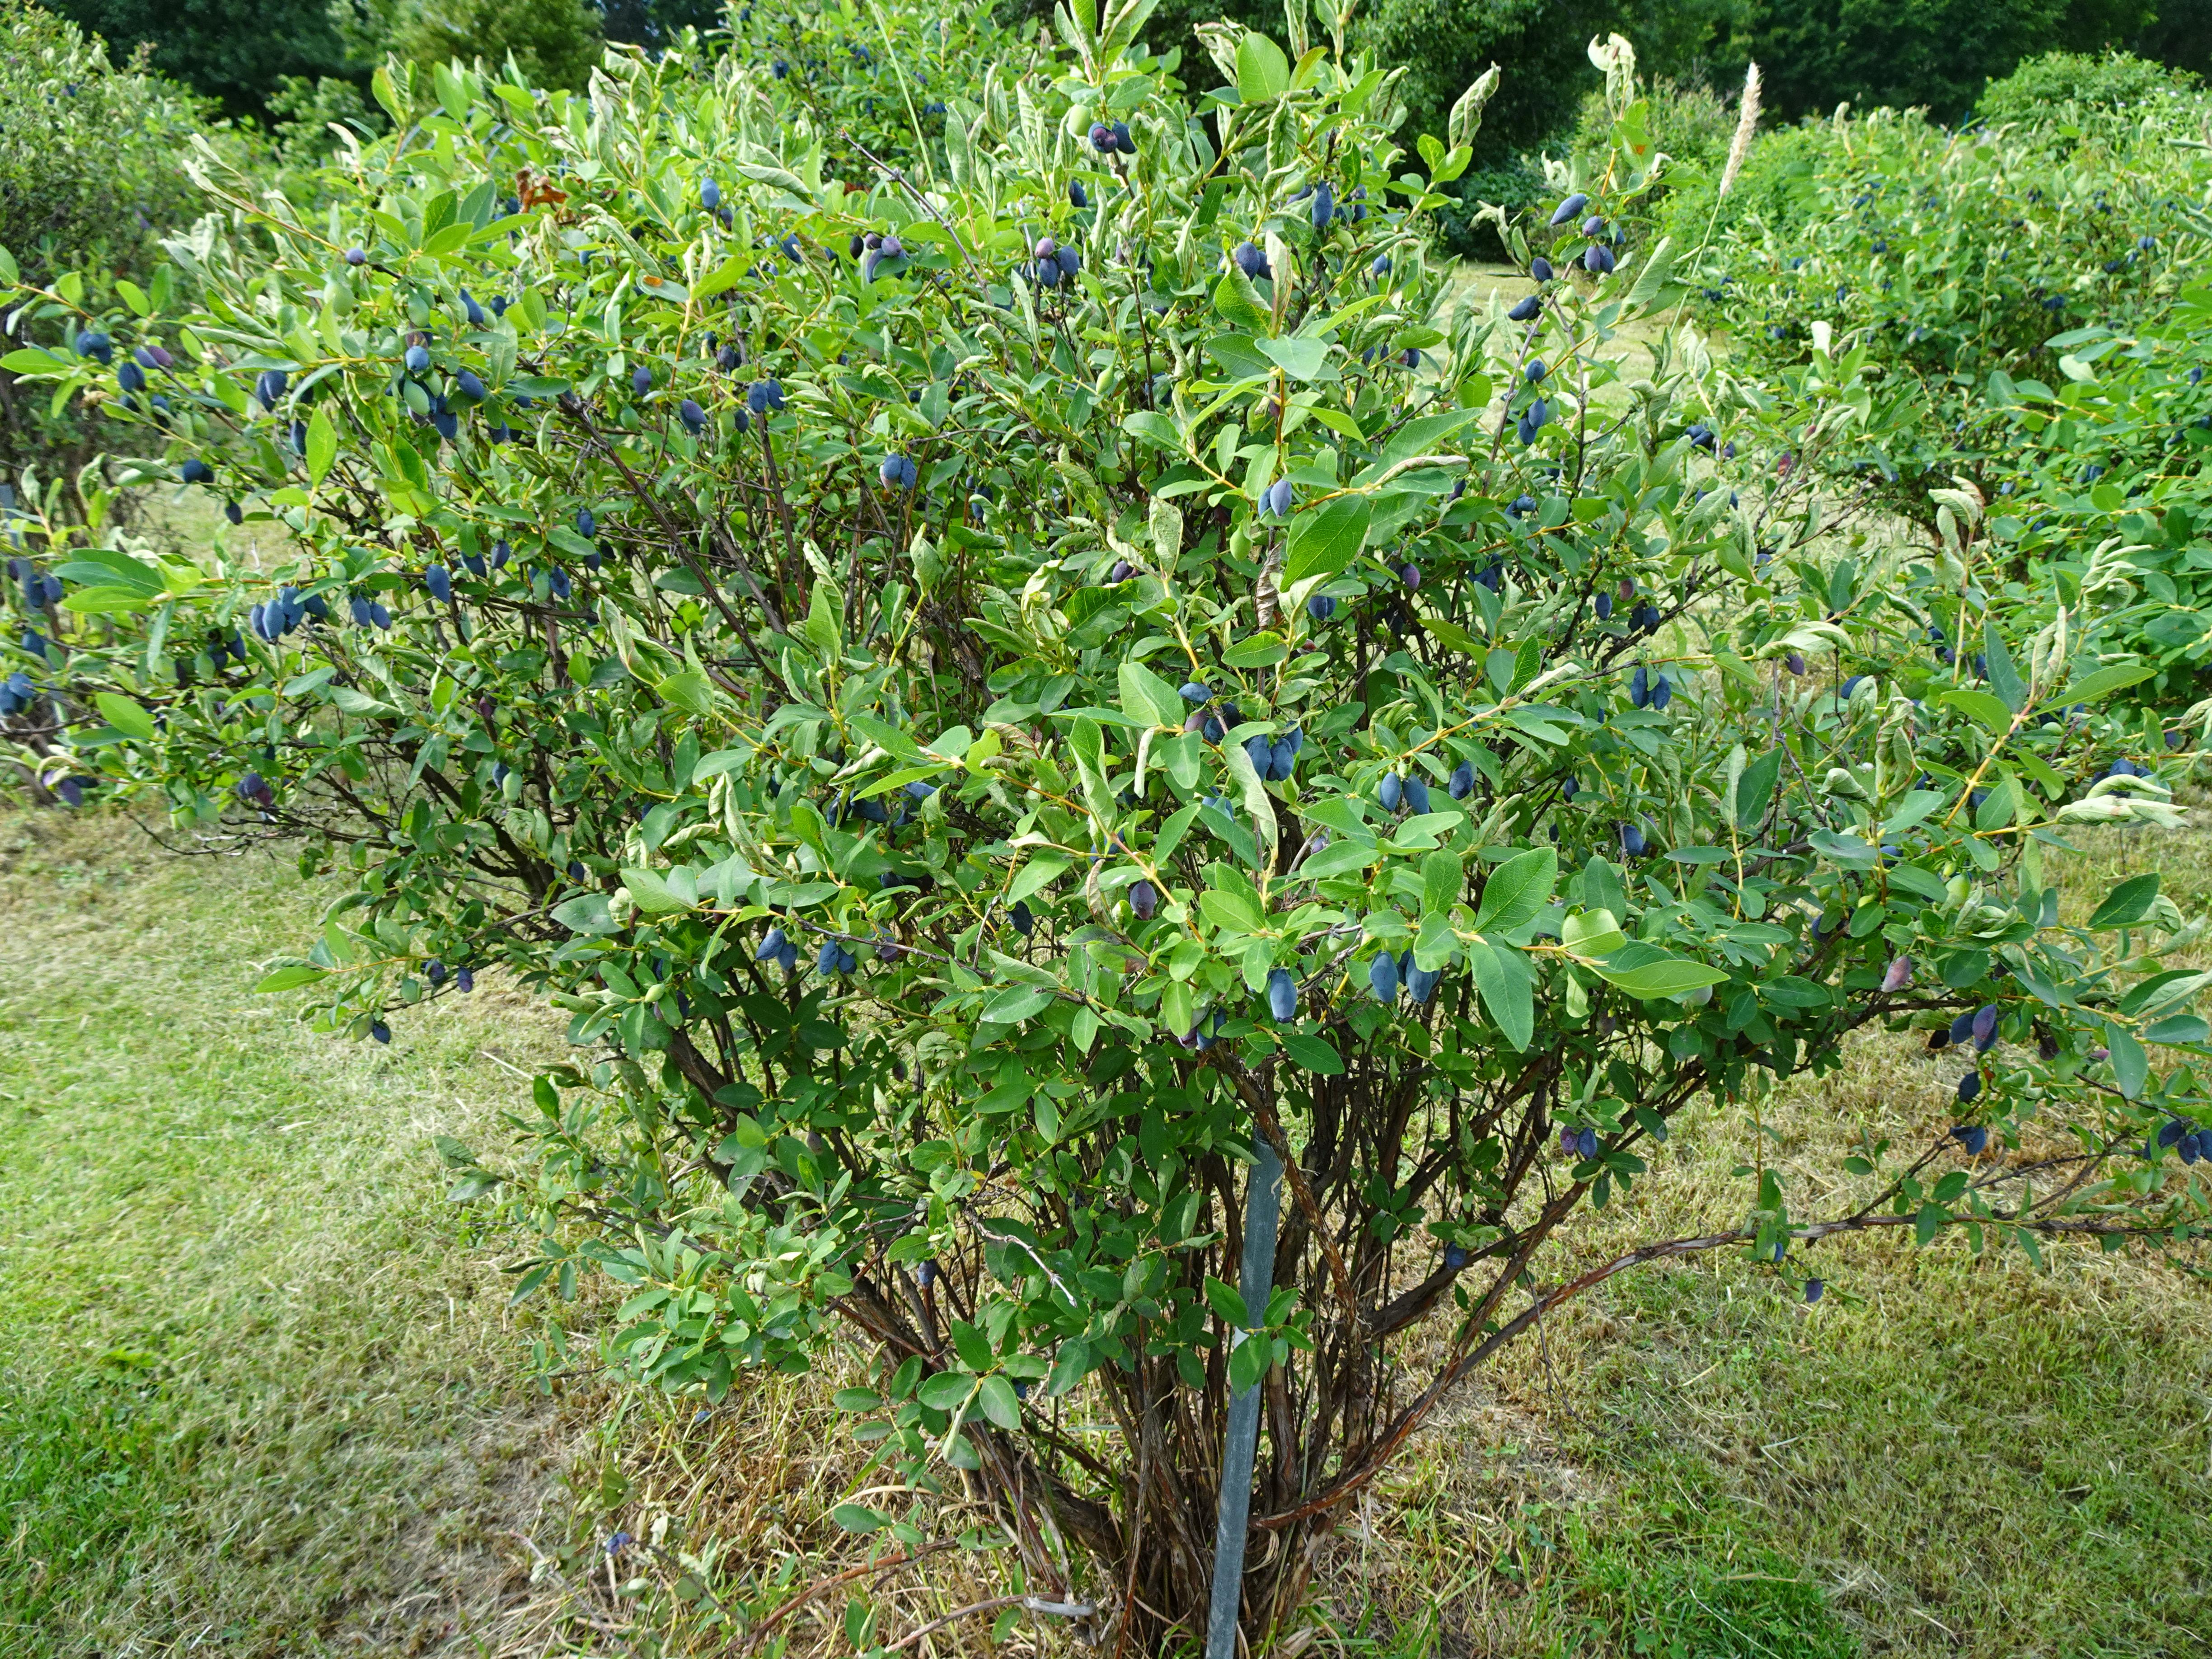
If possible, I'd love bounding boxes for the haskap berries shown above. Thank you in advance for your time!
[1528,257,1555,281]
[89,334,113,365]
[379,195,403,221]
[1111,121,1143,159]
[885,810,910,849]
[1269,473,1295,518]
[686,213,699,237]
[549,786,564,807]
[1309,182,1336,230]
[1336,228,1358,251]
[1365,380,1383,412]
[678,412,704,435]
[479,307,499,329]
[1952,1011,1977,1043]
[1389,559,1402,584]
[303,586,331,616]
[506,427,522,441]
[462,943,476,963]
[1836,907,1858,939]
[371,1019,393,1046]
[1607,229,1627,243]
[512,521,527,531]
[2157,1119,2185,1147]
[580,248,594,263]
[1259,252,1274,279]
[972,485,993,516]
[1036,257,1063,294]
[238,778,254,799]
[2028,515,2043,529]
[575,1172,590,1193]
[1542,394,1560,424]
[1518,409,1537,447]
[827,789,847,827]
[1753,554,1773,569]
[704,329,717,345]
[1914,773,1928,789]
[403,287,430,328]
[260,782,274,807]
[198,464,215,483]
[1582,244,1600,274]
[1372,255,1393,277]
[1308,587,1330,622]
[22,629,45,655]
[1689,985,1713,1010]
[1320,585,1338,617]
[1880,845,1904,868]
[223,497,245,526]
[170,661,188,683]
[151,396,169,409]
[1690,429,1716,448]
[1773,1242,1786,1262]
[1010,1379,1029,1399]
[881,451,903,480]
[1146,776,1166,803]
[480,687,501,719]
[77,329,91,358]
[1479,716,1496,733]
[1858,894,1876,907]
[1362,344,1377,362]
[900,459,920,490]
[892,250,911,281]
[765,331,779,344]
[696,489,710,517]
[263,745,278,760]
[769,775,782,793]
[2089,773,2121,796]
[266,369,289,396]
[341,546,377,564]
[424,562,453,600]
[1271,392,1282,419]
[404,344,431,375]
[572,501,595,536]
[1174,679,1218,701]
[251,602,274,643]
[1627,599,1648,633]
[1057,246,1083,273]
[1381,345,1391,361]
[1285,720,1303,753]
[1465,716,1479,730]
[346,1014,376,1042]
[244,771,262,794]
[1968,1126,1987,1157]
[491,762,509,790]
[1641,607,1664,636]
[1204,717,1224,745]
[1396,948,1414,984]
[1067,103,1100,136]
[1247,731,1272,783]
[718,206,734,228]
[1112,559,1131,582]
[1407,773,1429,815]
[135,348,159,368]
[1352,203,1369,223]
[397,195,419,217]
[506,379,532,408]
[1065,175,1089,209]
[1617,823,1644,854]
[1268,967,1298,1026]
[1475,567,1488,586]
[169,806,184,828]
[56,778,85,807]
[118,361,133,394]
[808,756,838,775]
[783,236,804,263]
[1575,252,1588,270]
[1154,307,1170,318]
[1776,450,1791,476]
[1096,456,1119,486]
[2155,780,2173,806]
[1768,1245,1777,1261]
[1203,786,1235,820]
[1978,1020,2000,1052]
[1196,1008,1228,1050]
[1950,1123,1975,1138]
[878,465,898,493]
[1911,698,1923,706]
[1582,216,1604,236]
[420,961,429,974]
[824,247,833,261]
[919,1261,937,1284]
[531,1204,542,1222]
[1234,240,1262,282]
[806,1131,824,1155]
[747,269,758,277]
[632,286,655,301]
[1257,484,1277,521]
[1406,958,1439,1006]
[207,644,233,670]
[1128,879,1157,920]
[1928,1027,1949,1048]
[1274,739,1296,781]
[461,551,488,579]
[2179,1132,2200,1164]
[1695,489,1707,502]
[1492,553,1503,577]
[119,396,136,408]
[192,413,213,438]
[765,237,778,257]
[713,907,727,923]
[1544,454,1564,480]
[1090,828,1123,860]
[1370,947,1398,1005]
[1503,408,1524,424]
[733,408,749,435]
[1324,382,1341,405]
[456,288,485,323]
[495,212,506,221]
[1557,1125,1577,1157]
[1403,561,1422,591]
[532,570,550,602]
[1549,823,1560,841]
[644,984,667,1002]
[1640,810,1658,846]
[1927,629,1946,642]
[673,991,693,1020]
[891,1063,905,1082]
[631,365,652,396]
[1385,605,1403,635]
[1594,590,1611,621]
[909,384,925,402]
[178,657,198,672]
[2195,1127,2211,1161]
[1450,479,1469,499]
[193,799,222,824]
[1563,775,1581,803]
[594,969,604,985]
[281,586,307,630]
[1616,579,1636,602]
[402,377,431,414]
[1328,900,1359,951]
[1968,1005,1995,1040]
[779,937,799,969]
[6,558,20,581]
[717,410,735,436]
[1970,655,1990,682]
[371,597,392,630]
[402,323,431,350]
[414,324,438,348]
[867,250,887,284]
[261,600,285,638]
[1791,1279,1807,1301]
[1736,439,1746,454]
[1813,913,1829,941]
[1354,185,1368,199]
[766,377,787,412]
[328,557,346,580]
[148,345,175,368]
[651,1000,666,1022]
[757,927,790,961]
[618,258,641,272]
[945,380,970,400]
[1450,951,1465,969]
[1312,827,1330,851]
[183,458,203,484]
[1183,707,1211,731]
[767,264,778,282]
[508,197,519,211]
[908,277,925,292]
[384,370,424,397]
[431,408,458,442]
[1094,364,1116,395]
[288,417,311,453]
[1216,701,1245,734]
[2091,1050,2109,1061]
[459,368,490,395]
[1580,1127,1599,1157]
[1396,349,1409,367]
[716,342,742,372]
[6,672,37,697]
[1944,641,1968,660]
[1572,321,1587,343]
[1630,669,1654,707]
[1818,885,1833,902]
[1650,672,1674,711]
[1550,193,1594,226]
[1087,119,1118,154]
[1114,245,1123,263]
[43,575,64,602]
[2165,733,2177,748]
[1503,500,1521,519]
[1144,257,1160,289]
[130,364,146,390]
[1597,691,1611,708]
[1286,183,1315,205]
[1739,1247,1758,1261]
[25,573,47,609]
[1559,284,1576,305]
[490,295,511,317]
[998,298,1014,314]
[1487,567,1499,592]
[1447,1243,1469,1270]
[937,275,953,286]
[665,255,679,262]
[620,404,640,432]
[1509,294,1540,321]
[1880,955,1913,994]
[228,631,251,664]
[871,924,898,956]
[1597,245,1615,276]
[1994,961,2012,977]
[815,937,841,974]
[1595,708,1606,722]
[1122,790,1137,806]
[1248,398,1268,436]
[2038,696,2059,725]
[1033,236,1057,256]
[840,352,848,365]
[600,539,618,561]
[1685,424,1708,437]
[2061,703,2083,723]
[1134,353,1170,375]
[1783,653,1807,679]
[748,381,768,413]
[1525,396,1547,429]
[1724,441,1735,457]
[642,799,658,817]
[1168,177,1186,198]
[1948,872,1973,903]
[179,806,198,827]
[428,963,445,979]
[699,176,722,211]
[1960,1070,1982,1102]
[1407,347,1421,370]
[1342,759,1362,778]
[906,780,941,798]
[982,512,995,524]
[849,786,889,824]
[1281,173,1307,193]
[850,236,863,260]
[880,870,900,891]
[1825,611,1843,625]
[1526,358,1546,384]
[1445,758,1483,797]
[1181,1022,1200,1042]
[1807,1277,1824,1303]
[194,652,217,684]
[1728,491,1740,511]
[323,281,354,314]
[680,399,706,424]
[456,965,474,994]
[2053,1052,2077,1083]
[529,567,538,581]
[2131,1166,2150,1196]
[346,247,367,265]
[1026,261,1036,281]
[1301,641,1317,650]
[586,551,603,572]
[899,790,917,812]
[2002,1014,2018,1040]
[2039,1038,2058,1058]
[594,223,609,240]
[2143,1138,2151,1159]
[350,594,377,629]
[486,415,509,444]
[1230,522,1253,562]
[881,234,903,255]
[674,214,690,236]
[401,978,423,1003]
[254,372,278,414]
[413,282,439,307]
[569,861,585,883]
[1840,675,1867,704]
[424,372,443,397]
[0,683,18,718]
[69,771,100,787]
[863,232,881,248]
[1378,772,1402,813]
[487,541,511,574]
[2108,758,2141,783]
[155,655,177,683]
[965,475,979,487]
[501,772,525,802]
[1009,902,1039,936]
[494,706,513,725]
[548,567,573,605]
[1933,640,1952,663]
[2130,771,2160,802]
[1973,792,1989,805]
[1766,449,1788,475]
[1217,255,1229,273]
[837,939,855,973]
[1335,199,1352,219]
[1515,494,1539,511]
[657,958,668,980]
[2147,1169,2165,1194]
[539,1208,557,1235]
